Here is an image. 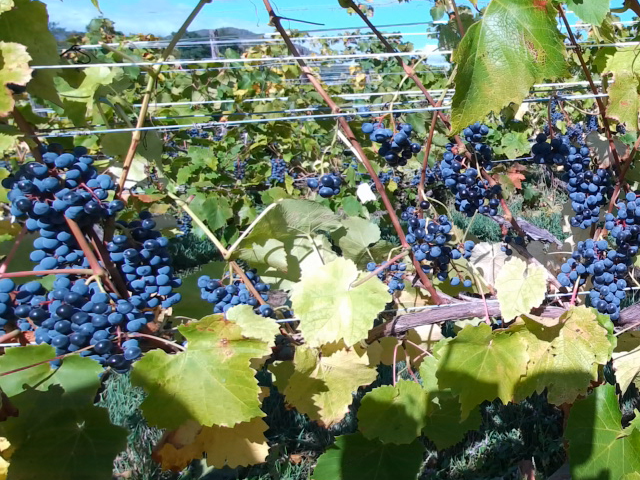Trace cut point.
<instances>
[{
	"label": "cut point",
	"mask_w": 640,
	"mask_h": 480,
	"mask_svg": "<svg viewBox=\"0 0 640 480\" xmlns=\"http://www.w3.org/2000/svg\"><path fill=\"white\" fill-rule=\"evenodd\" d=\"M93 280L96 281V285L98 287V289L100 290L101 293H105L106 289L103 287L102 283L100 282L99 278L96 275H90L88 278H86L84 280L85 284H89L91 283Z\"/></svg>",
	"instance_id": "cut-point-1"
},
{
	"label": "cut point",
	"mask_w": 640,
	"mask_h": 480,
	"mask_svg": "<svg viewBox=\"0 0 640 480\" xmlns=\"http://www.w3.org/2000/svg\"><path fill=\"white\" fill-rule=\"evenodd\" d=\"M337 126H338V119H336L334 123V139L331 141V143L328 146L325 147V149L323 150V154H326V152L333 147L335 142H337Z\"/></svg>",
	"instance_id": "cut-point-2"
},
{
	"label": "cut point",
	"mask_w": 640,
	"mask_h": 480,
	"mask_svg": "<svg viewBox=\"0 0 640 480\" xmlns=\"http://www.w3.org/2000/svg\"><path fill=\"white\" fill-rule=\"evenodd\" d=\"M571 108H573L574 110L584 114V115H599V112H587L584 111L583 109L576 107L575 105H571Z\"/></svg>",
	"instance_id": "cut-point-3"
},
{
	"label": "cut point",
	"mask_w": 640,
	"mask_h": 480,
	"mask_svg": "<svg viewBox=\"0 0 640 480\" xmlns=\"http://www.w3.org/2000/svg\"><path fill=\"white\" fill-rule=\"evenodd\" d=\"M403 247H404V246L401 244V245H399V246H396V247H394V248H391V249L388 251L387 259H390V258H391V254H392L394 251L399 250V249H402Z\"/></svg>",
	"instance_id": "cut-point-4"
}]
</instances>
